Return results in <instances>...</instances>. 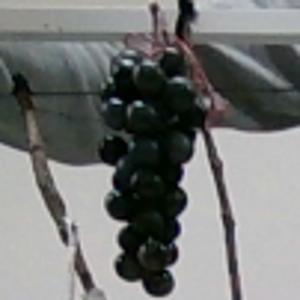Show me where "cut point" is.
Segmentation results:
<instances>
[{
    "mask_svg": "<svg viewBox=\"0 0 300 300\" xmlns=\"http://www.w3.org/2000/svg\"><path fill=\"white\" fill-rule=\"evenodd\" d=\"M163 10L161 0H148L146 12L152 25L151 55L158 50V14Z\"/></svg>",
    "mask_w": 300,
    "mask_h": 300,
    "instance_id": "obj_1",
    "label": "cut point"
}]
</instances>
